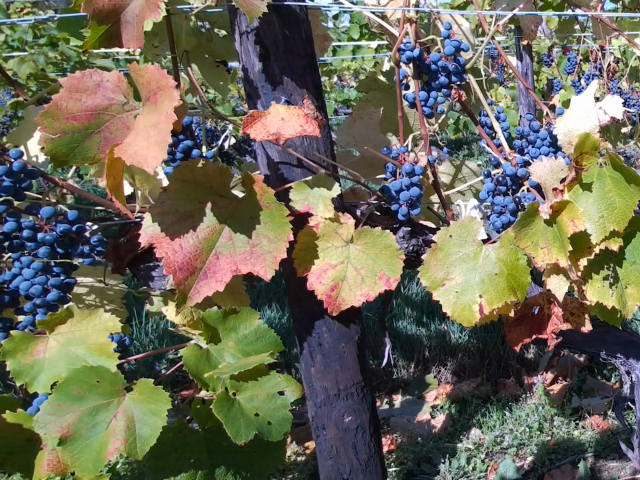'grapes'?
<instances>
[{"label":"grapes","mask_w":640,"mask_h":480,"mask_svg":"<svg viewBox=\"0 0 640 480\" xmlns=\"http://www.w3.org/2000/svg\"><path fill=\"white\" fill-rule=\"evenodd\" d=\"M24 152L19 148H10L8 157L14 160L10 167L0 164V198H11L14 201H24L26 192L35 188L33 180L40 177L38 167H27L21 159Z\"/></svg>","instance_id":"f8a65327"},{"label":"grapes","mask_w":640,"mask_h":480,"mask_svg":"<svg viewBox=\"0 0 640 480\" xmlns=\"http://www.w3.org/2000/svg\"><path fill=\"white\" fill-rule=\"evenodd\" d=\"M49 393L44 392L36 395L35 399L31 401V406H26V413L30 415H36L40 412V407L48 400Z\"/></svg>","instance_id":"ef6de9ee"},{"label":"grapes","mask_w":640,"mask_h":480,"mask_svg":"<svg viewBox=\"0 0 640 480\" xmlns=\"http://www.w3.org/2000/svg\"><path fill=\"white\" fill-rule=\"evenodd\" d=\"M444 30L439 32L443 39V55L437 51H431L424 57V52L412 45V39L406 37L404 42L397 46V53L400 54V62L404 65H411L414 61H420V70L428 76L424 87L417 89L418 100L421 101L422 113L427 119L434 117L433 106L437 103L444 104L446 99L439 94H443L449 101L454 99L452 95L451 83L457 84L467 79L465 56H456L454 53L468 52V43L461 42L460 39L450 38L452 23L444 22Z\"/></svg>","instance_id":"0513c4c2"},{"label":"grapes","mask_w":640,"mask_h":480,"mask_svg":"<svg viewBox=\"0 0 640 480\" xmlns=\"http://www.w3.org/2000/svg\"><path fill=\"white\" fill-rule=\"evenodd\" d=\"M408 152V147L406 145L399 146L397 149H394L392 146H382L380 148V153L383 156H388L391 161H397L400 157V154H406Z\"/></svg>","instance_id":"1ff8f66d"},{"label":"grapes","mask_w":640,"mask_h":480,"mask_svg":"<svg viewBox=\"0 0 640 480\" xmlns=\"http://www.w3.org/2000/svg\"><path fill=\"white\" fill-rule=\"evenodd\" d=\"M524 119L528 122L525 127L517 126L513 129L515 136H522V139H515L512 146L519 155L515 159L517 167L515 168L508 161L501 163L503 174L492 177L489 169L481 172V177L485 181L482 191L478 194V198L491 203V212L486 216L489 221V229L491 235L497 237L506 227L515 221L519 214L517 211L522 210L524 205L531 201H537L540 205H544L536 199L530 192H518L519 181L522 177H526L527 182L533 187L538 185L531 173L527 171L531 165L530 160L540 161L543 155L546 159L559 160L560 158L566 165L571 163L568 154L562 150V145L557 143V136L553 133V124L548 122L546 130L540 129L541 122L535 120L532 112H527Z\"/></svg>","instance_id":"b958b902"},{"label":"grapes","mask_w":640,"mask_h":480,"mask_svg":"<svg viewBox=\"0 0 640 480\" xmlns=\"http://www.w3.org/2000/svg\"><path fill=\"white\" fill-rule=\"evenodd\" d=\"M172 144L167 146L166 160L169 162V167L163 168V173L166 176H170L174 172V168L180 165V162H186L189 160H195L202 156V151L199 148H193L195 141L193 139H187L183 132H173L171 134Z\"/></svg>","instance_id":"5460f4e3"},{"label":"grapes","mask_w":640,"mask_h":480,"mask_svg":"<svg viewBox=\"0 0 640 480\" xmlns=\"http://www.w3.org/2000/svg\"><path fill=\"white\" fill-rule=\"evenodd\" d=\"M400 172L398 180H391L380 186L378 192L389 204V210L396 211V218L400 221H407L410 215L418 217L422 213L419 205L422 202L425 188L420 182V176L425 173V167L406 161L401 165Z\"/></svg>","instance_id":"84f90ec7"},{"label":"grapes","mask_w":640,"mask_h":480,"mask_svg":"<svg viewBox=\"0 0 640 480\" xmlns=\"http://www.w3.org/2000/svg\"><path fill=\"white\" fill-rule=\"evenodd\" d=\"M108 339L117 344L114 351H120L123 348V344L130 346L133 343V338L130 335L121 332L110 333Z\"/></svg>","instance_id":"2adb6a1f"},{"label":"grapes","mask_w":640,"mask_h":480,"mask_svg":"<svg viewBox=\"0 0 640 480\" xmlns=\"http://www.w3.org/2000/svg\"><path fill=\"white\" fill-rule=\"evenodd\" d=\"M13 208L11 199L0 202V213H5L0 232V250L11 254V270L0 274V285L7 284V290H0V314L9 308L15 316L28 313L15 322L7 316H0V340L10 336V330H37L36 320L45 319L57 313L60 305H69V293L76 286L72 275L79 269L77 262L35 260H77L84 266L95 262V255L106 252V237L103 234L86 236L88 218L77 209H69L63 219L52 222L54 230L43 232L41 224L33 219L23 218L20 210Z\"/></svg>","instance_id":"01657485"},{"label":"grapes","mask_w":640,"mask_h":480,"mask_svg":"<svg viewBox=\"0 0 640 480\" xmlns=\"http://www.w3.org/2000/svg\"><path fill=\"white\" fill-rule=\"evenodd\" d=\"M478 120L479 126L484 129L485 134L488 136H492L494 133L493 123L487 116L485 110H480L478 112Z\"/></svg>","instance_id":"54f908b8"},{"label":"grapes","mask_w":640,"mask_h":480,"mask_svg":"<svg viewBox=\"0 0 640 480\" xmlns=\"http://www.w3.org/2000/svg\"><path fill=\"white\" fill-rule=\"evenodd\" d=\"M399 74H400V82L401 83V90L402 91H408L410 89V85L407 82H403L404 81V77L408 74V71L405 68H401L399 69Z\"/></svg>","instance_id":"dcf779d0"},{"label":"grapes","mask_w":640,"mask_h":480,"mask_svg":"<svg viewBox=\"0 0 640 480\" xmlns=\"http://www.w3.org/2000/svg\"><path fill=\"white\" fill-rule=\"evenodd\" d=\"M493 114L496 117L498 123H500V128L505 135V138L509 140L511 138V133L509 132L511 124L507 121V115L505 114L504 108L502 106L496 107Z\"/></svg>","instance_id":"e5b3c951"},{"label":"grapes","mask_w":640,"mask_h":480,"mask_svg":"<svg viewBox=\"0 0 640 480\" xmlns=\"http://www.w3.org/2000/svg\"><path fill=\"white\" fill-rule=\"evenodd\" d=\"M25 213L36 219L47 220L55 216L56 208L54 206H43L42 204H27Z\"/></svg>","instance_id":"83cd7487"},{"label":"grapes","mask_w":640,"mask_h":480,"mask_svg":"<svg viewBox=\"0 0 640 480\" xmlns=\"http://www.w3.org/2000/svg\"><path fill=\"white\" fill-rule=\"evenodd\" d=\"M383 168H384V177L386 179H391L394 178L397 174V166L393 163V162H385L383 164Z\"/></svg>","instance_id":"91a60905"},{"label":"grapes","mask_w":640,"mask_h":480,"mask_svg":"<svg viewBox=\"0 0 640 480\" xmlns=\"http://www.w3.org/2000/svg\"><path fill=\"white\" fill-rule=\"evenodd\" d=\"M481 142H484L486 145H488V144H487V142H486L484 139H481V140L479 141V146H480L481 148H484V147L481 145ZM488 146H489V145H488ZM489 147H490V146H489ZM484 152H485L486 154H489V152L486 150V148H484Z\"/></svg>","instance_id":"802abce8"}]
</instances>
